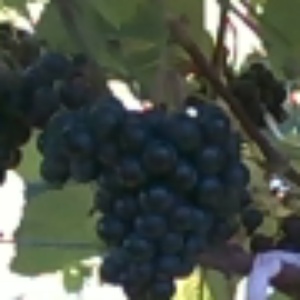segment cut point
<instances>
[{"instance_id": "1", "label": "cut point", "mask_w": 300, "mask_h": 300, "mask_svg": "<svg viewBox=\"0 0 300 300\" xmlns=\"http://www.w3.org/2000/svg\"><path fill=\"white\" fill-rule=\"evenodd\" d=\"M174 52L173 33L168 29H164V37L162 47L160 49L157 65L155 68L154 82L151 92V107L159 109L164 100L166 77L169 64L172 60Z\"/></svg>"}]
</instances>
